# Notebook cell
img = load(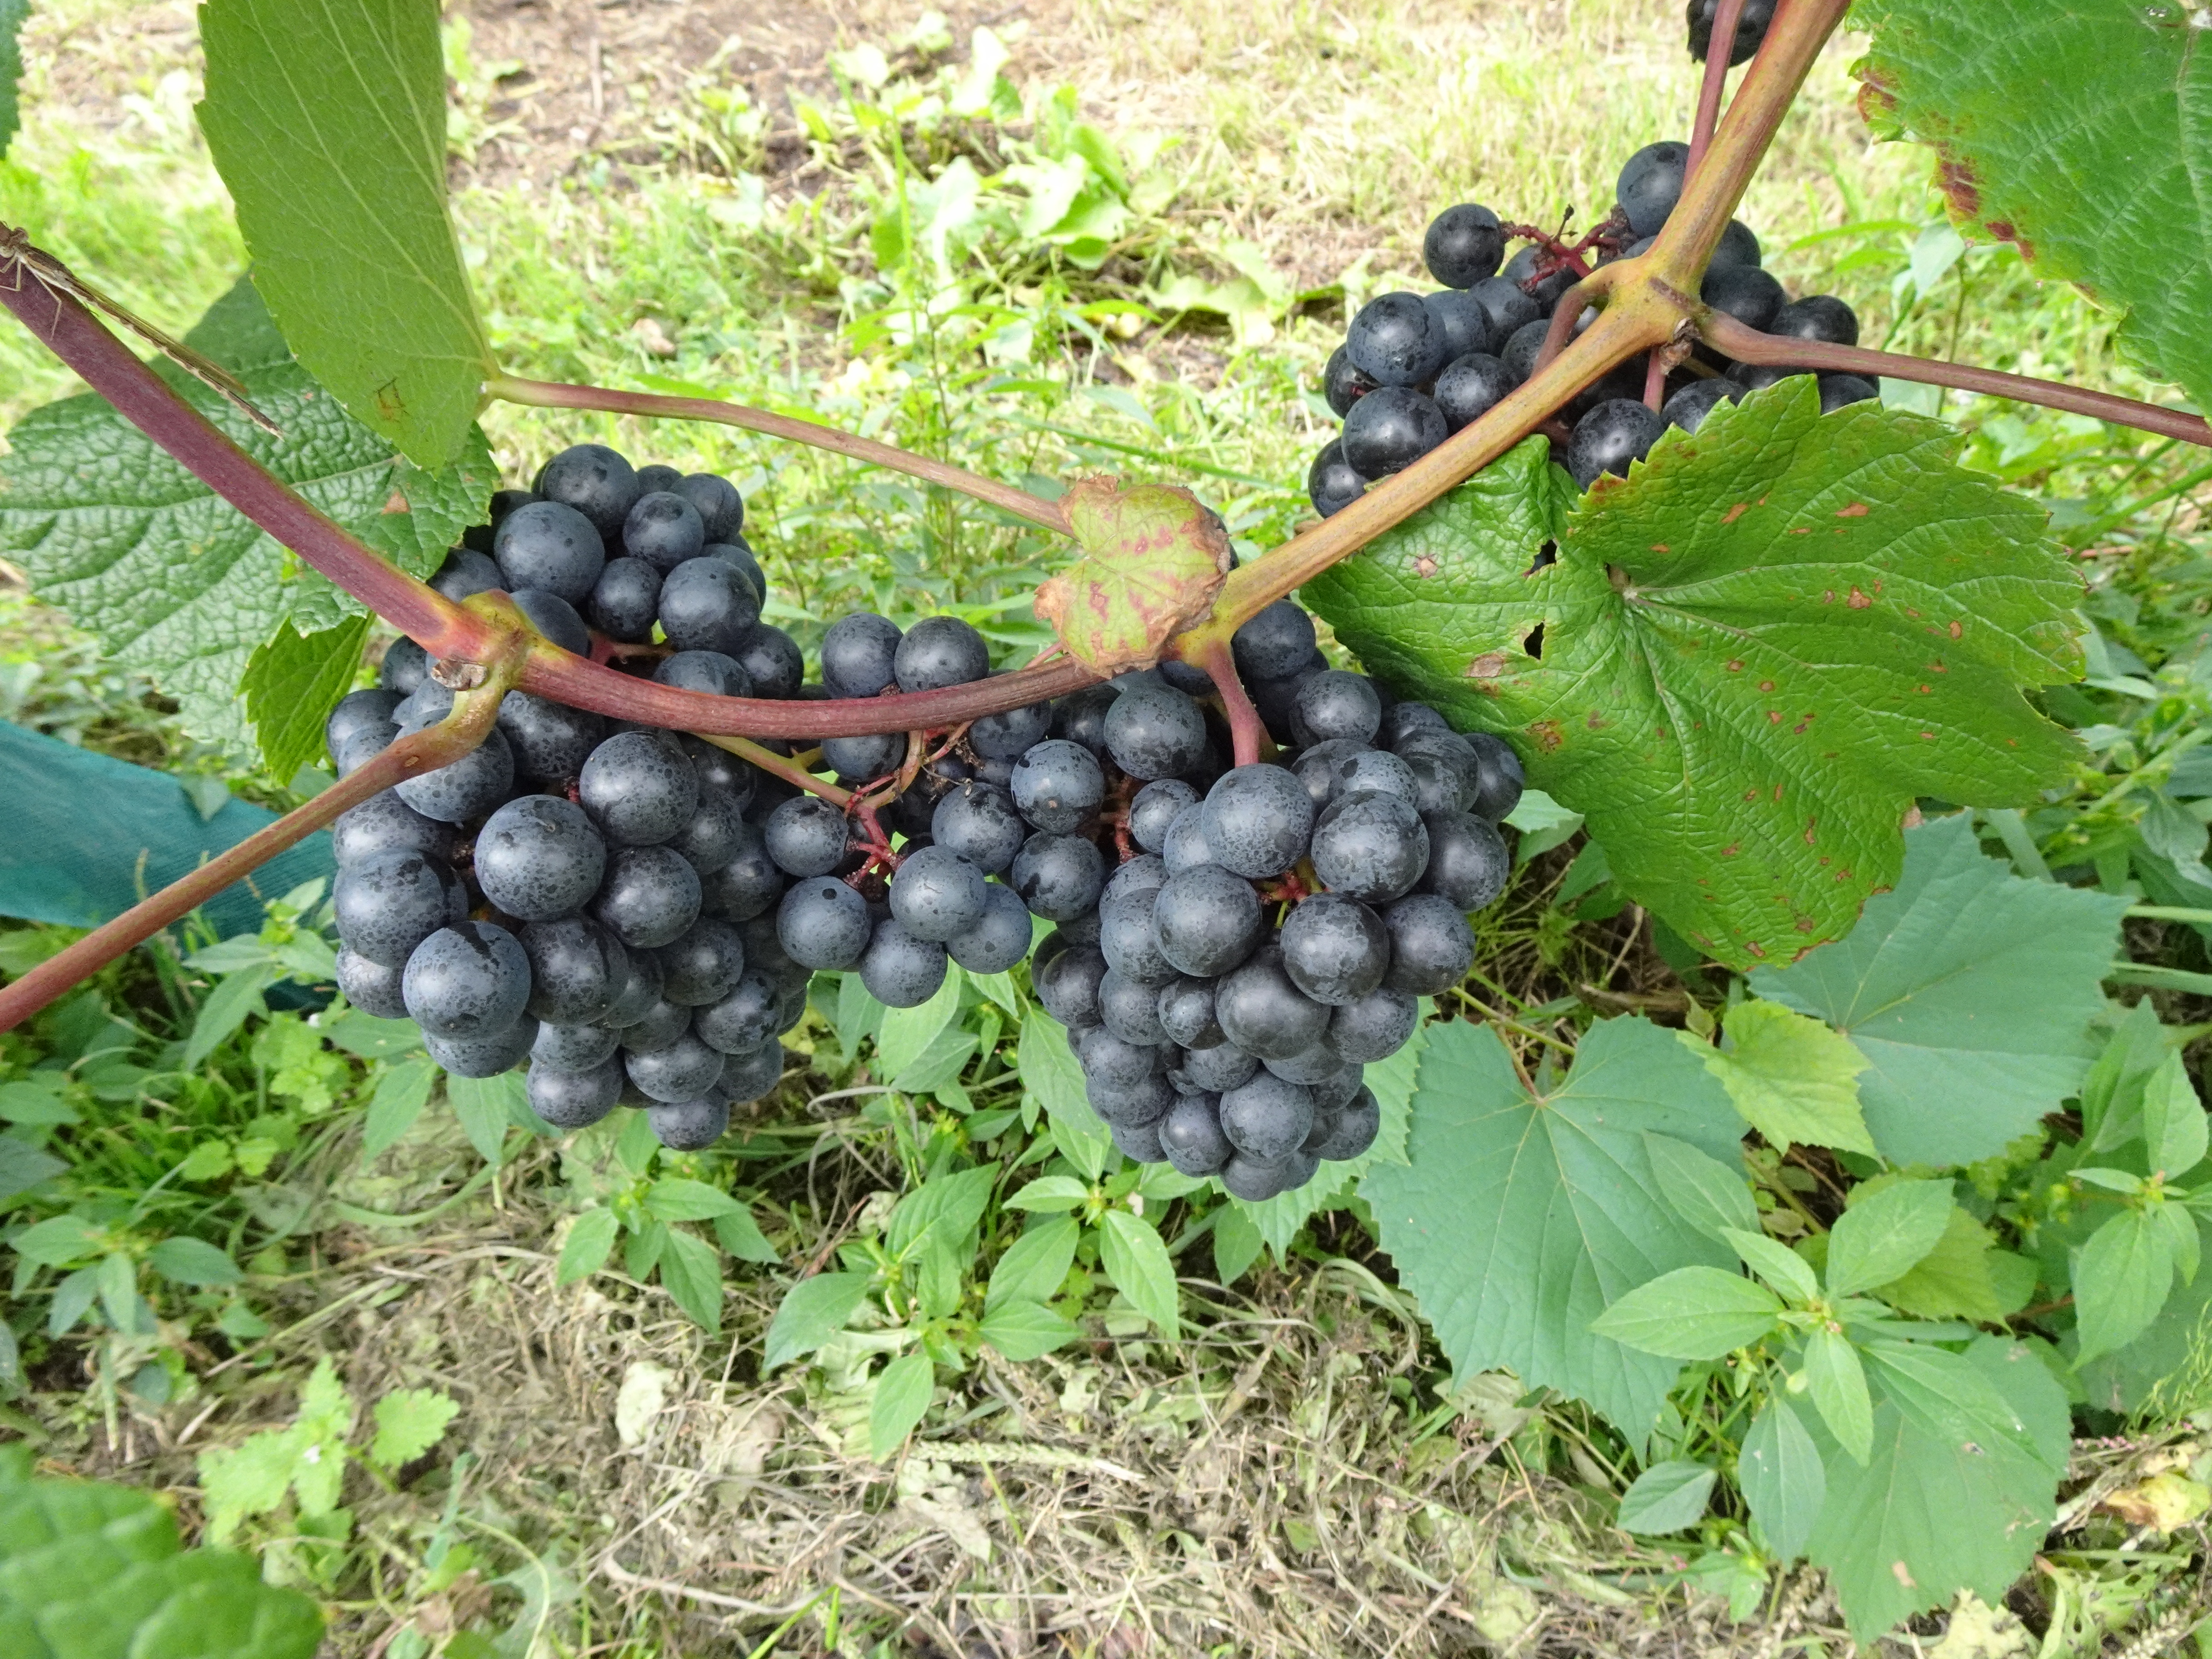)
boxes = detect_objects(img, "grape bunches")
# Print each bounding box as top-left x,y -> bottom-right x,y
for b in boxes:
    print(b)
1308,142 -> 1881,518
325,445 -> 800,1151
767,618 -> 1119,1002
1031,597 -> 1526,1196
